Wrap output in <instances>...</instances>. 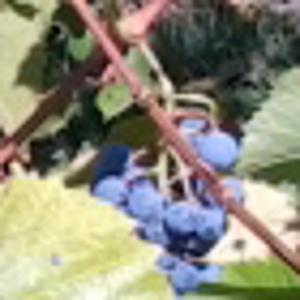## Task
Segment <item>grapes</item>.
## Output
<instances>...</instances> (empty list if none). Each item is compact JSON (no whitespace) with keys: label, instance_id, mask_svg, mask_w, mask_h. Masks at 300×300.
<instances>
[{"label":"grapes","instance_id":"3","mask_svg":"<svg viewBox=\"0 0 300 300\" xmlns=\"http://www.w3.org/2000/svg\"><path fill=\"white\" fill-rule=\"evenodd\" d=\"M222 181L235 196H237L245 204L247 203V192L238 178L223 177Z\"/></svg>","mask_w":300,"mask_h":300},{"label":"grapes","instance_id":"1","mask_svg":"<svg viewBox=\"0 0 300 300\" xmlns=\"http://www.w3.org/2000/svg\"><path fill=\"white\" fill-rule=\"evenodd\" d=\"M91 195L123 208L138 219L146 244L165 248L158 267L168 272L175 296L221 279L217 263L186 260L216 250L230 229L228 212L168 144L132 148L118 140L105 145Z\"/></svg>","mask_w":300,"mask_h":300},{"label":"grapes","instance_id":"2","mask_svg":"<svg viewBox=\"0 0 300 300\" xmlns=\"http://www.w3.org/2000/svg\"><path fill=\"white\" fill-rule=\"evenodd\" d=\"M178 128L203 159L220 173H226L237 164L240 139L234 131H213L211 124L198 116L183 118Z\"/></svg>","mask_w":300,"mask_h":300}]
</instances>
